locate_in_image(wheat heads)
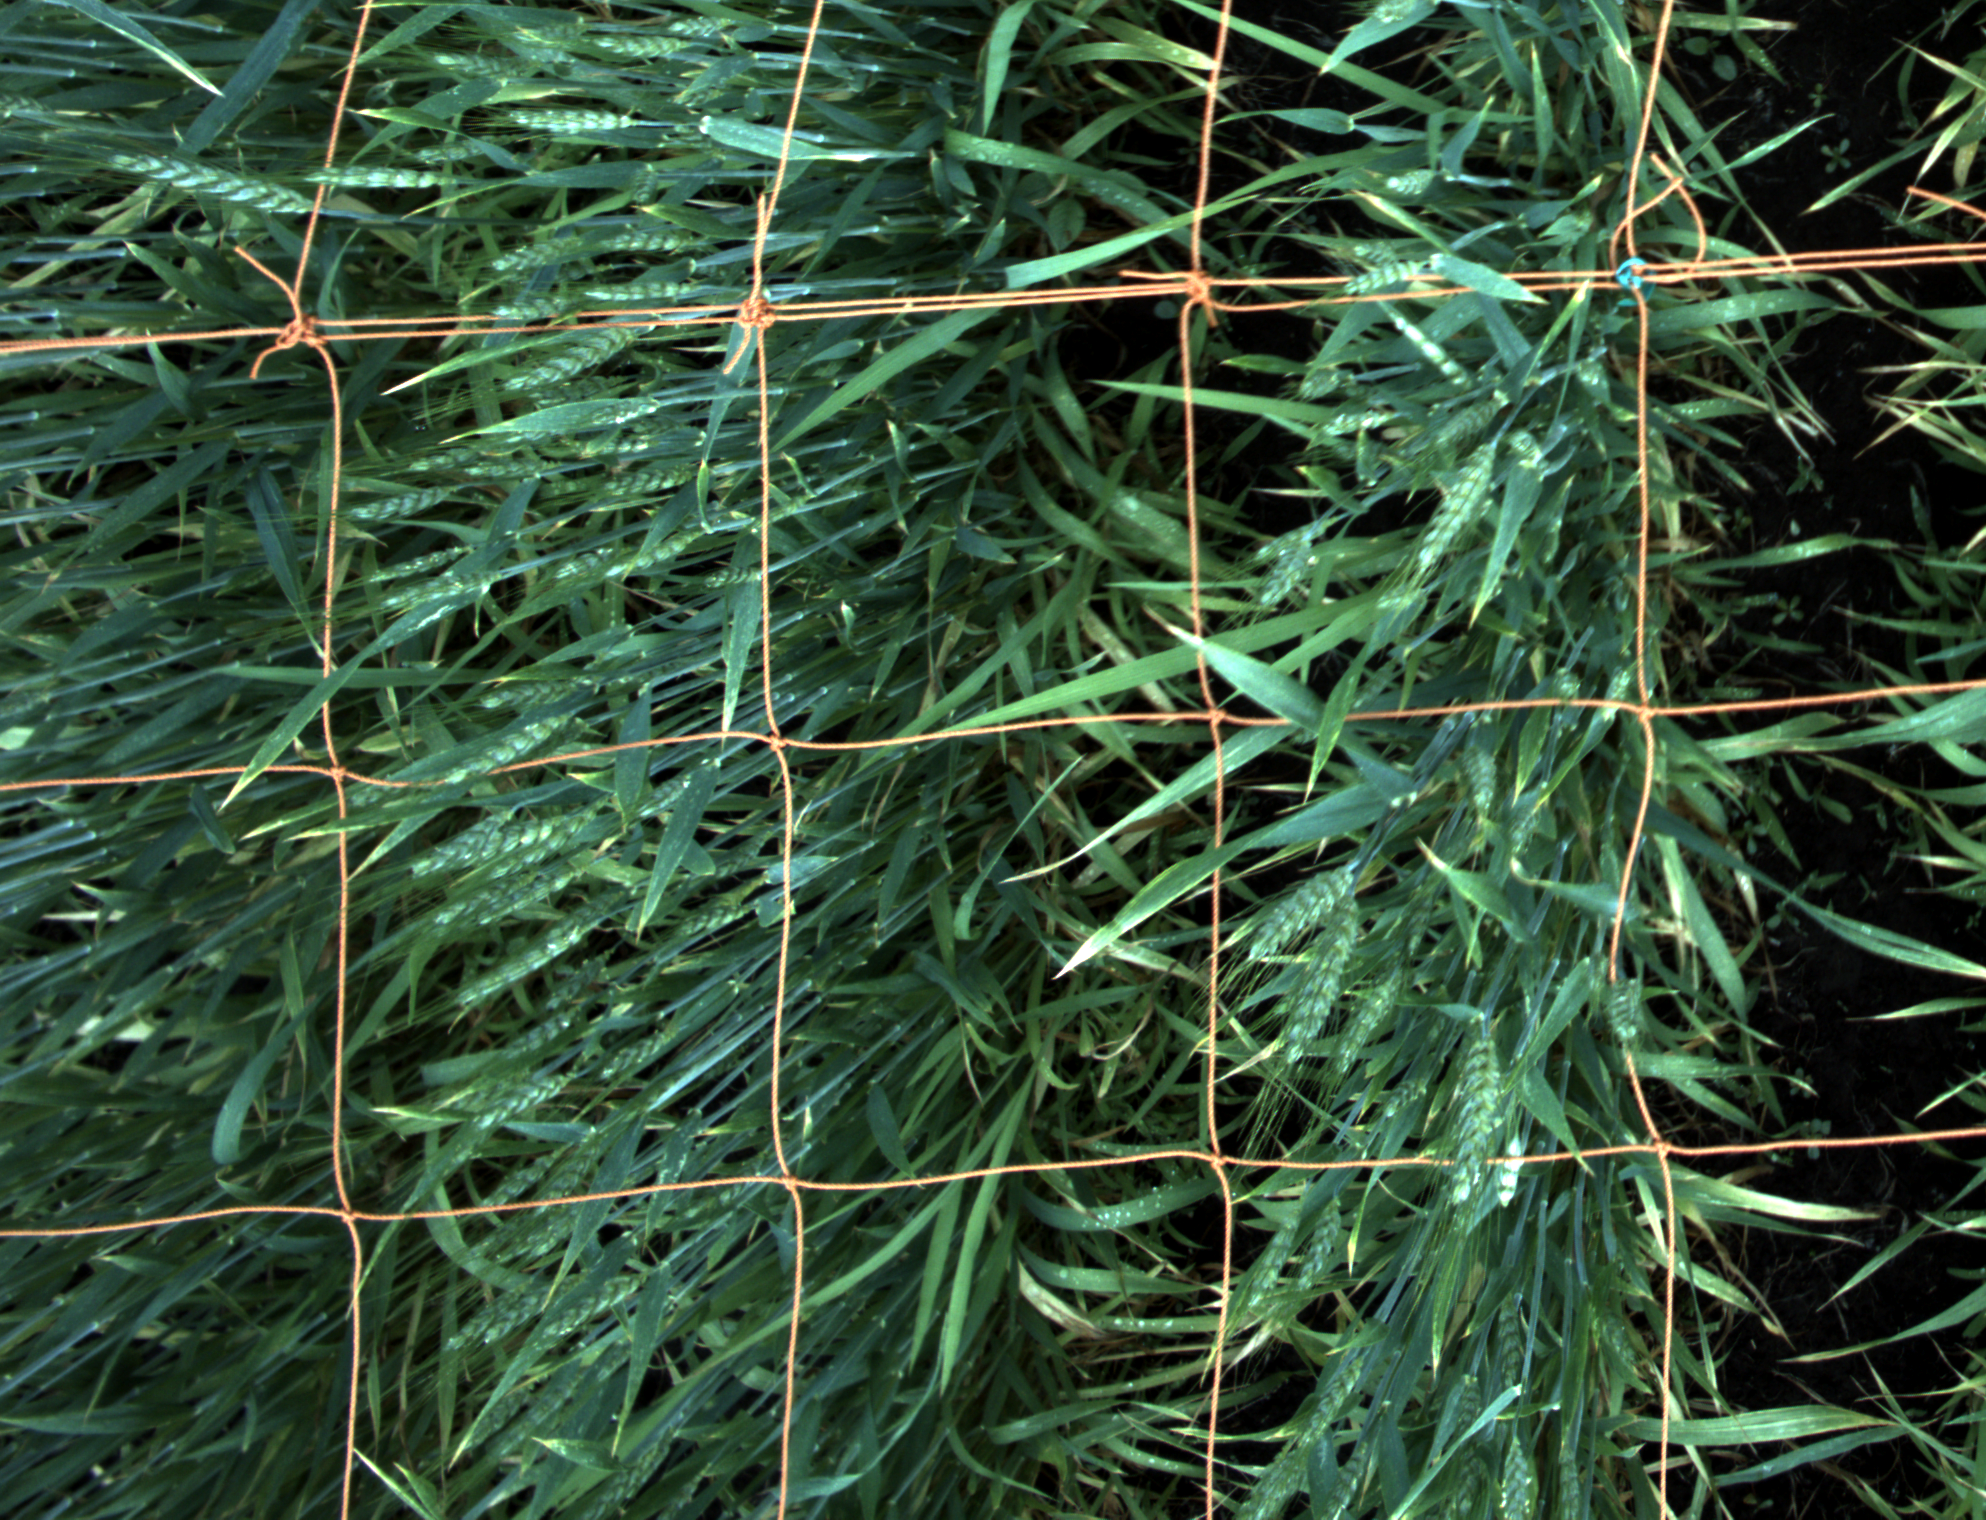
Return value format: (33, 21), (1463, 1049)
(471, 1072), (570, 1131)
(627, 418), (681, 440)
(1578, 207), (1595, 231)
(462, 457), (547, 478)
(598, 657), (682, 690)
(465, 1381), (534, 1444)
(0, 683), (46, 723)
(370, 544), (460, 585)
(532, 22), (592, 43)
(1259, 539), (1312, 607)
(1447, 1040), (1501, 1205)
(717, 1148), (765, 1202)
(1332, 976), (1397, 1075)
(1389, 311), (1473, 390)
(432, 51), (540, 81)
(1253, 514), (1329, 566)
(1509, 804), (1544, 851)
(1299, 1353), (1364, 1444)
(1284, 895), (1361, 1063)
(473, 862), (576, 929)
(544, 886), (626, 943)
(687, 87), (723, 109)
(587, 36), (692, 60)
(483, 1272), (584, 1342)
(442, 1276), (531, 1348)
(415, 133), (512, 166)
(676, 124), (716, 154)
(691, 892), (729, 917)
(752, 494), (809, 528)
(458, 924), (583, 1003)
(1381, 1074), (1424, 1117)
(1298, 368), (1340, 400)
(302, 165), (460, 189)
(1507, 430), (1535, 459)
(0, 87), (53, 118)
(1610, 669), (1631, 705)
(407, 447), (476, 474)
(623, 1065), (691, 1122)
(531, 1131), (602, 1215)
(1251, 1203), (1305, 1305)
(599, 1338), (632, 1378)
(491, 790), (608, 879)
(1556, 1442), (1581, 1518)
(542, 1268), (644, 1338)
(1251, 1447), (1304, 1520)
(674, 900), (755, 936)
(108, 152), (315, 215)
(1456, 1378), (1483, 1437)
(1349, 239), (1400, 268)
(712, 829), (772, 880)
(1252, 1416), (1312, 1491)
(603, 523), (705, 578)
(700, 563), (762, 590)
(661, 1475), (699, 1518)
(563, 437), (650, 461)
(1459, 744), (1497, 807)
(1350, 658), (1396, 708)
(1321, 407), (1390, 435)
(1291, 731), (1320, 745)
(1344, 258), (1423, 296)
(523, 42), (578, 67)
(1377, 585), (1423, 612)
(1417, 442), (1496, 569)
(599, 1026), (671, 1082)
(492, 295), (574, 320)
(1612, 976), (1641, 1040)
(629, 167), (657, 204)
(434, 870), (542, 925)
(1494, 1135), (1522, 1207)
(502, 327), (637, 394)
(350, 482), (455, 523)
(1332, 442), (1357, 460)
(1600, 1301), (1636, 1367)
(464, 1232), (499, 1265)
(1444, 1442), (1484, 1520)
(501, 1005), (577, 1061)
(604, 466), (692, 496)
(410, 806), (515, 877)
(495, 1365), (587, 1458)
(1343, 385), (1379, 400)
(439, 1136), (475, 1178)
(541, 950), (611, 1013)
(464, 811), (573, 860)
(1554, 665), (1581, 698)
(555, 544), (615, 577)
(529, 373), (611, 410)
(478, 1148), (561, 1210)
(627, 1443), (668, 1499)
(600, 226), (692, 255)
(490, 236), (584, 273)
(1589, 303), (1604, 331)
(513, 718), (588, 762)
(650, 775), (687, 809)
(441, 711), (575, 784)
(346, 783), (405, 810)
(381, 565), (501, 607)
(583, 400), (657, 427)
(1247, 867), (1354, 962)
(583, 1428), (659, 1516)
(1319, 1443), (1366, 1520)
(668, 14), (733, 39)
(584, 281), (694, 304)
(693, 262), (730, 280)
(1407, 891), (1435, 955)
(478, 680), (580, 708)
(529, 1206), (583, 1257)
(1295, 1195), (1343, 1293)
(433, 1077), (510, 1113)
(505, 108), (631, 137)
(1499, 1293), (1522, 1390)
(1386, 167), (1436, 198)
(1432, 393), (1504, 451)
(496, 1221), (571, 1270)
(1371, 0), (1422, 24)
